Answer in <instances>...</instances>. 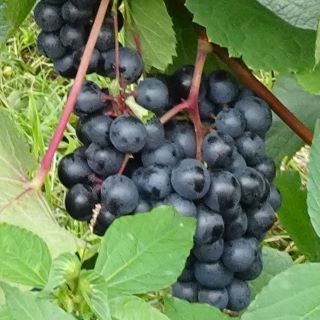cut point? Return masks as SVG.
Returning a JSON list of instances; mask_svg holds the SVG:
<instances>
[{
    "mask_svg": "<svg viewBox=\"0 0 320 320\" xmlns=\"http://www.w3.org/2000/svg\"><path fill=\"white\" fill-rule=\"evenodd\" d=\"M212 50L213 47L210 45L208 41L199 40L193 77L186 101L175 105L173 108H171L169 111H167L164 115L160 117L161 124H164L167 120H169L179 112H185L189 114L192 122L194 123V129L196 133V161L202 160L200 152V147L202 143V130L198 113V96L200 89V80L207 53L211 52Z\"/></svg>",
    "mask_w": 320,
    "mask_h": 320,
    "instance_id": "1",
    "label": "cut point"
},
{
    "mask_svg": "<svg viewBox=\"0 0 320 320\" xmlns=\"http://www.w3.org/2000/svg\"><path fill=\"white\" fill-rule=\"evenodd\" d=\"M111 11H112V16H114L116 80H118V82H119V72H118V42H117V5H116V0H114V2H113Z\"/></svg>",
    "mask_w": 320,
    "mask_h": 320,
    "instance_id": "2",
    "label": "cut point"
}]
</instances>
